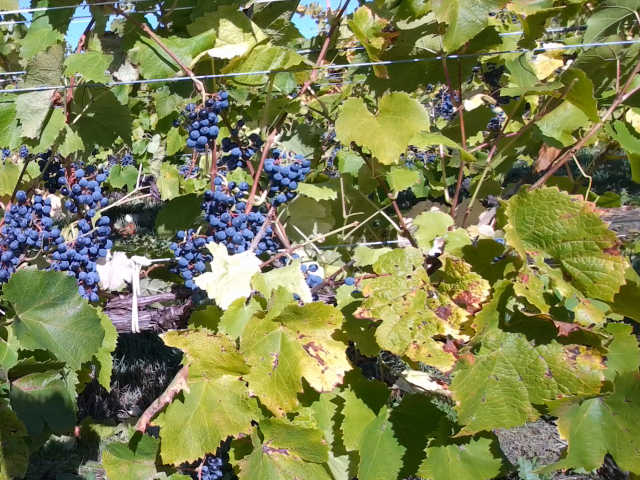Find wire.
Returning a JSON list of instances; mask_svg holds the SVG:
<instances>
[{
	"instance_id": "obj_1",
	"label": "wire",
	"mask_w": 640,
	"mask_h": 480,
	"mask_svg": "<svg viewBox=\"0 0 640 480\" xmlns=\"http://www.w3.org/2000/svg\"><path fill=\"white\" fill-rule=\"evenodd\" d=\"M640 39L636 40H615V41H603L592 43L573 44L569 46H549V47H532L526 49H510L507 51H484L478 53H459L452 55H437V56H423V57H411L403 59H383L373 62H338L331 64H318V69H333L340 67H375L385 64H405L413 62H425V61H439V60H454L461 58H481L486 56H510L512 54H529L535 52H551V51H572L583 48L605 47V46H617V45H639Z\"/></svg>"
},
{
	"instance_id": "obj_2",
	"label": "wire",
	"mask_w": 640,
	"mask_h": 480,
	"mask_svg": "<svg viewBox=\"0 0 640 480\" xmlns=\"http://www.w3.org/2000/svg\"><path fill=\"white\" fill-rule=\"evenodd\" d=\"M102 82L84 83V84H59L39 87H26L21 89H1V94H23L28 92H41L61 89H86V88H98L102 87Z\"/></svg>"
},
{
	"instance_id": "obj_3",
	"label": "wire",
	"mask_w": 640,
	"mask_h": 480,
	"mask_svg": "<svg viewBox=\"0 0 640 480\" xmlns=\"http://www.w3.org/2000/svg\"><path fill=\"white\" fill-rule=\"evenodd\" d=\"M405 239H391L386 241H372V242H361V243H338L334 245H317L318 250H336L340 248H364V247H374V246H388L394 244H405Z\"/></svg>"
},
{
	"instance_id": "obj_4",
	"label": "wire",
	"mask_w": 640,
	"mask_h": 480,
	"mask_svg": "<svg viewBox=\"0 0 640 480\" xmlns=\"http://www.w3.org/2000/svg\"><path fill=\"white\" fill-rule=\"evenodd\" d=\"M192 80L191 76L187 77H166V78H152L146 80H131L127 82H105V87H129L133 85H148L154 83H168V82H189Z\"/></svg>"
},
{
	"instance_id": "obj_5",
	"label": "wire",
	"mask_w": 640,
	"mask_h": 480,
	"mask_svg": "<svg viewBox=\"0 0 640 480\" xmlns=\"http://www.w3.org/2000/svg\"><path fill=\"white\" fill-rule=\"evenodd\" d=\"M270 70L266 71H243V72H220L212 74H197V79H214L222 77H245V76H269Z\"/></svg>"
}]
</instances>
